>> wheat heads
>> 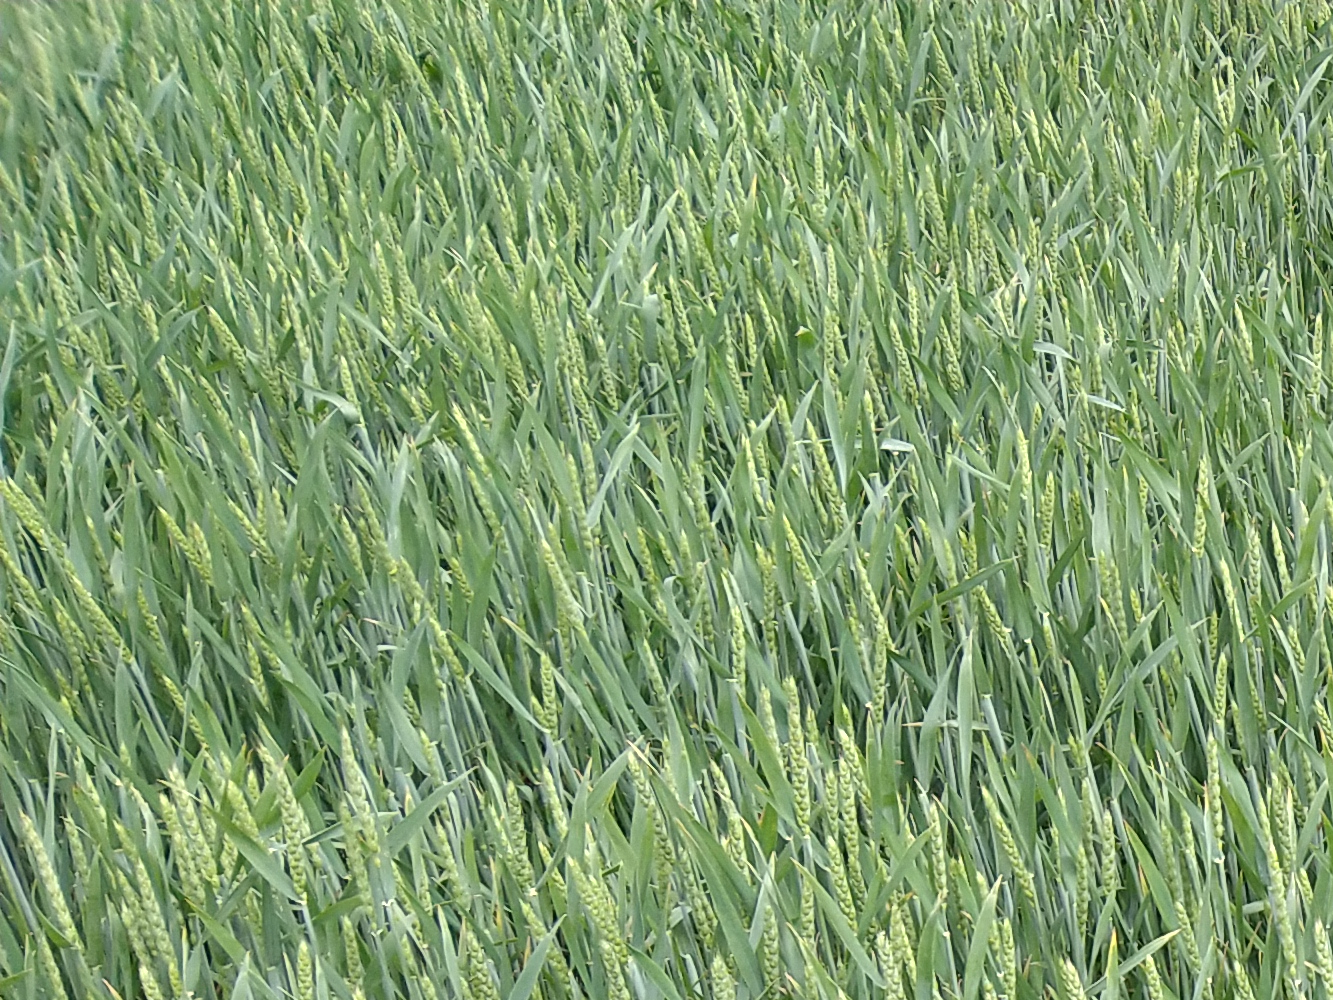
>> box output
[880,43,896,87]
[800,874,814,934]
[464,15,490,64]
[848,627,869,685]
[43,257,81,359]
[1310,583,1325,613]
[694,463,708,524]
[539,205,555,251]
[543,766,568,844]
[302,808,315,859]
[424,197,436,227]
[503,340,529,397]
[549,523,579,603]
[1285,627,1308,673]
[287,294,310,362]
[177,183,192,214]
[635,527,664,608]
[622,33,636,70]
[989,238,1004,290]
[166,962,184,1000]
[296,941,317,1000]
[566,205,576,254]
[110,246,142,303]
[1237,239,1245,273]
[222,166,241,229]
[44,373,65,416]
[198,791,246,888]
[889,316,912,398]
[419,384,432,410]
[672,457,698,497]
[755,442,773,502]
[598,332,616,409]
[731,162,749,204]
[555,360,574,423]
[756,114,782,165]
[273,488,290,546]
[6,507,27,558]
[358,515,377,565]
[963,204,977,258]
[14,282,39,327]
[1044,619,1055,656]
[841,550,858,622]
[1085,148,1096,201]
[245,769,262,804]
[1224,376,1232,432]
[530,290,549,370]
[74,323,95,354]
[505,783,535,887]
[808,423,848,526]
[93,237,109,300]
[382,103,393,172]
[227,257,260,330]
[0,571,14,609]
[34,38,54,116]
[79,598,103,645]
[225,46,242,70]
[629,171,639,222]
[280,294,292,328]
[513,576,527,663]
[761,618,777,670]
[763,904,780,1000]
[581,443,601,535]
[574,867,618,955]
[728,293,747,344]
[969,19,976,63]
[1181,803,1194,855]
[269,140,305,212]
[1140,470,1147,507]
[249,350,283,404]
[839,734,870,799]
[733,607,747,701]
[979,872,1001,962]
[965,55,983,115]
[136,864,181,962]
[838,499,845,536]
[308,252,321,292]
[1130,407,1150,450]
[239,431,269,496]
[1316,131,1323,181]
[1175,902,1211,1000]
[695,563,717,663]
[141,968,179,1000]
[142,3,164,45]
[978,18,989,80]
[592,881,616,915]
[427,746,449,824]
[0,549,45,620]
[457,267,469,318]
[436,179,457,231]
[1236,311,1256,359]
[339,797,374,909]
[277,11,298,49]
[1174,322,1186,356]
[983,980,1007,1000]
[1189,115,1202,170]
[471,288,494,361]
[580,167,596,207]
[678,846,717,951]
[1048,217,1062,273]
[927,804,946,896]
[721,312,734,350]
[628,336,641,384]
[729,77,740,120]
[211,241,229,306]
[1013,121,1034,168]
[135,109,166,172]
[498,12,516,59]
[51,418,72,474]
[129,391,143,424]
[894,83,904,106]
[1268,884,1298,983]
[339,728,381,862]
[845,90,855,124]
[1134,138,1145,208]
[894,131,907,191]
[1086,803,1092,857]
[544,90,566,127]
[1129,588,1146,625]
[932,35,949,88]
[637,639,668,714]
[1316,702,1333,753]
[764,250,779,307]
[160,506,212,583]
[1245,640,1259,689]
[1033,403,1045,446]
[109,140,131,171]
[951,417,963,453]
[86,36,103,67]
[657,529,680,583]
[220,95,252,175]
[315,26,346,85]
[499,174,511,209]
[1144,953,1171,1000]
[275,606,286,641]
[145,304,169,372]
[529,981,555,1000]
[784,515,815,586]
[1207,610,1223,658]
[1077,842,1090,933]
[804,962,824,1000]
[541,844,563,886]
[758,356,778,404]
[1235,340,1256,387]
[599,947,641,1000]
[726,54,734,83]
[290,46,313,92]
[340,915,364,978]
[614,51,630,118]
[798,246,814,303]
[13,231,23,285]
[1300,868,1315,914]
[1196,501,1205,554]
[111,268,133,306]
[267,212,283,250]
[567,320,586,378]
[484,312,512,378]
[1031,218,1038,272]
[697,160,711,206]
[914,186,924,229]
[105,30,131,90]
[165,676,209,749]
[1066,491,1079,527]
[1079,416,1088,455]
[249,643,265,701]
[806,709,816,747]
[1237,0,1247,36]
[1099,558,1112,626]
[1232,959,1259,1000]
[550,176,566,207]
[669,283,695,350]
[367,182,377,222]
[86,520,114,591]
[336,324,372,399]
[427,643,444,691]
[618,170,631,225]
[356,477,400,577]
[1002,292,1011,334]
[924,170,947,247]
[1283,165,1292,230]
[250,195,280,260]
[1161,669,1175,708]
[1151,98,1159,156]
[846,862,878,940]
[121,908,149,971]
[35,299,49,335]
[409,54,443,121]
[192,522,214,569]
[558,603,570,670]
[785,678,808,831]
[15,7,40,66]
[1213,76,1227,124]
[1292,7,1309,57]
[450,404,496,492]
[952,223,965,293]
[1102,808,1118,891]
[99,0,122,41]
[710,956,735,1000]
[1215,654,1227,714]
[519,450,533,489]
[120,872,158,958]
[520,899,571,996]
[1166,331,1184,369]
[58,601,94,661]
[836,756,858,855]
[1091,352,1105,429]
[100,125,110,160]
[201,377,237,433]
[785,157,801,199]
[271,419,303,474]
[1095,664,1109,729]
[150,661,171,690]
[841,707,855,742]
[952,284,963,361]
[1039,473,1055,541]
[214,134,232,167]
[50,536,78,573]
[1017,429,1032,494]
[900,902,917,949]
[956,2,967,31]
[489,175,508,216]
[572,176,581,219]
[1169,245,1182,310]
[804,64,817,101]
[407,918,420,944]
[542,653,558,734]
[483,237,516,297]
[448,90,459,117]
[59,677,80,711]
[547,115,559,160]
[1311,319,1321,383]
[206,497,228,560]
[220,0,236,30]
[246,128,274,195]
[1003,224,1017,269]
[403,386,425,427]
[1000,510,1029,559]
[142,237,161,258]
[437,822,461,899]
[209,308,258,389]
[672,217,685,260]
[23,473,45,509]
[328,260,348,289]
[404,793,432,909]
[1188,172,1198,212]
[897,524,919,578]
[744,312,756,365]
[761,561,778,623]
[1293,796,1308,837]
[390,215,403,240]
[451,134,464,164]
[1324,586,1333,683]
[533,698,549,734]
[83,773,109,827]
[72,80,89,120]
[314,149,327,198]
[1179,851,1200,924]
[388,34,423,92]
[323,151,346,190]
[375,33,379,78]
[1284,974,1298,1000]
[693,112,721,168]
[1199,459,1209,501]
[677,59,691,89]
[726,354,750,417]
[259,749,308,884]
[575,2,594,36]
[992,810,1027,889]
[1300,749,1315,803]
[726,813,751,885]
[255,491,264,534]
[500,234,523,284]
[1070,737,1086,768]
[501,39,516,95]
[885,168,899,244]
[705,76,718,118]
[1171,934,1177,970]
[1031,282,1042,341]
[899,211,909,261]
[66,571,131,658]
[434,571,453,608]
[1193,0,1219,40]
[323,435,336,485]
[993,63,1016,111]
[1207,734,1225,847]
[1250,683,1269,747]
[1061,961,1108,1000]
[1317,930,1333,1000]
[1195,298,1203,335]
[948,854,969,932]
[20,816,84,949]
[169,771,215,877]
[1302,500,1309,532]
[8,477,53,534]
[49,160,77,233]
[865,360,890,425]
[269,72,288,118]
[1272,522,1290,592]
[583,129,599,173]
[814,146,826,213]
[946,537,958,613]
[292,92,311,123]
[476,105,488,146]
[398,684,420,724]
[858,205,866,246]
[828,115,836,164]
[977,588,1005,636]
[140,186,158,238]
[544,289,565,373]
[522,158,535,211]
[939,319,963,390]
[1173,575,1186,602]
[337,353,356,402]
[545,542,582,629]
[90,330,106,371]
[383,6,400,41]
[743,436,761,506]
[1325,332,1333,383]
[1272,789,1291,874]
[733,128,742,172]
[463,931,505,1000]
[217,776,261,846]
[423,974,456,1000]
[290,123,303,153]
[958,529,968,563]
[465,25,474,64]
[323,110,340,132]
[1169,170,1189,236]
[873,933,921,1000]
[122,125,142,169]
[225,499,274,563]
[618,127,632,176]
[826,370,843,416]
[1000,917,1016,1000]
[1242,5,1258,30]
[1046,280,1068,320]
[71,165,101,214]
[909,284,918,350]
[138,587,170,667]
[685,212,718,293]
[966,537,977,611]
[560,126,575,174]
[0,623,10,660]
[860,562,884,630]
[866,320,881,392]
[1259,196,1270,222]
[346,323,386,410]
[242,604,283,677]
[631,759,678,868]
[864,391,876,460]
[1147,0,1160,52]
[679,529,701,611]
[820,311,834,373]
[460,974,480,1000]
[1147,341,1158,392]
[1111,145,1127,212]
[655,102,669,141]
[715,214,728,244]
[760,685,791,780]
[708,757,732,799]
[95,361,130,417]
[119,743,131,799]
[826,769,838,844]
[54,319,82,379]
[448,556,474,609]
[389,109,417,164]
[891,903,916,979]
[744,254,753,307]
[334,507,364,565]
[983,478,993,513]
[401,0,417,49]
[1245,527,1259,605]
[0,478,49,551]
[157,361,180,405]
[1164,828,1179,902]
[657,287,677,372]
[871,619,886,726]
[445,343,462,376]
[1320,474,1333,565]
[1226,57,1239,118]
[375,240,393,330]
[574,382,601,445]
[556,254,587,327]
[1264,818,1279,887]
[34,434,51,469]
[264,759,275,790]
[992,89,1013,164]
[827,244,839,310]
[88,138,99,178]
[704,520,720,562]
[826,838,854,919]
[351,296,368,346]
[1086,284,1099,349]
[0,166,23,207]
[969,183,990,249]
[965,247,976,306]
[279,50,295,92]
[400,556,468,697]
[36,167,59,216]
[0,202,11,216]
[391,245,420,321]
[1110,562,1132,638]
[463,171,475,217]
[161,794,202,903]
[470,358,482,413]
[1219,561,1247,639]
[1322,630,1333,679]
[756,285,773,341]
[99,324,111,366]
[440,265,451,298]
[194,26,216,84]
[466,468,506,555]
[168,0,197,60]
[39,933,71,1000]
[52,600,92,694]
[895,36,912,79]
[604,3,624,61]
[567,454,588,549]
[779,398,804,473]
[452,73,474,126]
